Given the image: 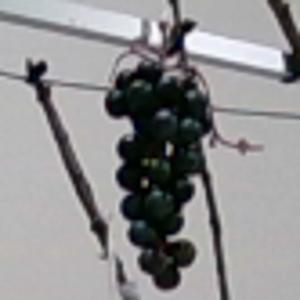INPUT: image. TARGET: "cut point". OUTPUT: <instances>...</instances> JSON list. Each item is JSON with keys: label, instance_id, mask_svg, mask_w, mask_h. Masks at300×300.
Here are the masks:
<instances>
[{"label": "cut point", "instance_id": "6a23745f", "mask_svg": "<svg viewBox=\"0 0 300 300\" xmlns=\"http://www.w3.org/2000/svg\"><path fill=\"white\" fill-rule=\"evenodd\" d=\"M169 2L168 0H162V12L157 19V29L161 36V50L158 56V60L165 62L166 45H167V32L171 27V21L169 17Z\"/></svg>", "mask_w": 300, "mask_h": 300}]
</instances>
